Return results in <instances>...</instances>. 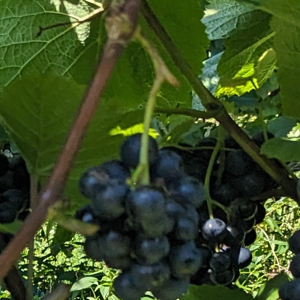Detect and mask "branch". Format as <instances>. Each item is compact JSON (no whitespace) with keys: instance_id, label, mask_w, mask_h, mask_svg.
Instances as JSON below:
<instances>
[{"instance_id":"obj_1","label":"branch","mask_w":300,"mask_h":300,"mask_svg":"<svg viewBox=\"0 0 300 300\" xmlns=\"http://www.w3.org/2000/svg\"><path fill=\"white\" fill-rule=\"evenodd\" d=\"M138 8L209 113L219 123L223 124L232 139L267 171L273 181L292 196L297 204H300V184L288 176L241 132L234 120L229 117L224 105L195 76L194 71L181 56L170 35L162 27L147 2L145 0H105L103 6V29L108 39L104 44L103 55L89 81L83 102L77 111L65 143L59 152V159L37 206L32 214L27 217L18 234L12 237L0 257V279L7 276L13 262L19 257L23 246L30 242L38 227L44 222L52 204L61 195L82 139L100 101L104 86L114 69L116 61L120 57L125 43L136 30Z\"/></svg>"}]
</instances>
